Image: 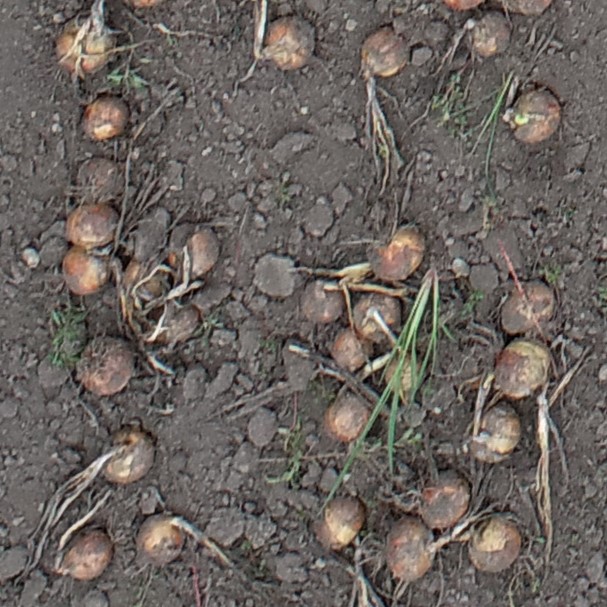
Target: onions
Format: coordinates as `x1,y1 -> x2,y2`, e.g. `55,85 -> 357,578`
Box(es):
68,203 -> 114,250
418,475 -> 466,530
471,404 -> 520,456
181,231 -> 219,274
127,262 -> 168,306
492,338 -> 550,397
58,526 -> 110,580
381,517 -> 435,579
321,389 -> 372,443
139,514 -> 187,563
330,332 -> 367,369
76,337 -> 134,396
105,427 -> 151,481
55,19 -> 110,72
77,159 -> 116,198
313,493 -> 364,547
468,515 -> 520,571
441,0 -> 479,10
388,352 -> 426,392
358,29 -> 404,80
467,11 -> 510,56
262,16 -> 311,68
310,283 -> 343,323
83,97 -> 126,140
506,84 -> 558,143
354,295 -> 402,339
370,226 -> 422,279
501,281 -> 554,334
63,248 -> 111,292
